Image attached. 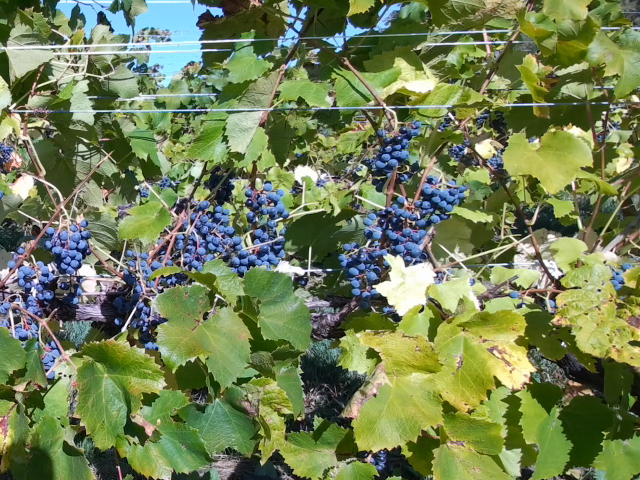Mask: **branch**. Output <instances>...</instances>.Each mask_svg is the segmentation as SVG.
Segmentation results:
<instances>
[{
    "label": "branch",
    "instance_id": "obj_2",
    "mask_svg": "<svg viewBox=\"0 0 640 480\" xmlns=\"http://www.w3.org/2000/svg\"><path fill=\"white\" fill-rule=\"evenodd\" d=\"M462 146L468 152H470V154L475 158V160L486 171H488L492 176H494V178L498 182V184L501 187V189L506 193V196L511 201V203L514 206L516 212L522 218L524 224L527 227V230H528V233H529V236H530V243L534 244V246H535V255L537 257V261L540 262V266L543 267V270L546 272L549 280L551 281V283L555 287V288H528V289L520 290L519 294L520 295H525V294H530V293H556V294H562L563 293L562 286L554 278L551 270L548 268V265L542 259V255L540 253V244L538 242L537 237L535 236V233L533 231V227L531 225V222L528 220L526 214L521 210L519 204L517 203L516 199L513 197V195L510 192V190L506 187V185H505L504 181L502 180V178L499 176V174L495 170H493L489 165H487V163L485 161H483V159L477 154V152L472 147L469 146L468 143L463 142Z\"/></svg>",
    "mask_w": 640,
    "mask_h": 480
},
{
    "label": "branch",
    "instance_id": "obj_13",
    "mask_svg": "<svg viewBox=\"0 0 640 480\" xmlns=\"http://www.w3.org/2000/svg\"><path fill=\"white\" fill-rule=\"evenodd\" d=\"M233 172L232 168H229L222 176L221 178L212 186V188L210 189V191L204 196V200L208 201L211 196L215 193V191L217 190V188L226 180L227 177H229L231 175V173Z\"/></svg>",
    "mask_w": 640,
    "mask_h": 480
},
{
    "label": "branch",
    "instance_id": "obj_16",
    "mask_svg": "<svg viewBox=\"0 0 640 480\" xmlns=\"http://www.w3.org/2000/svg\"><path fill=\"white\" fill-rule=\"evenodd\" d=\"M383 115L385 117V119L390 123L391 127L395 126V121L394 119L390 116L388 110L386 109L385 111H383Z\"/></svg>",
    "mask_w": 640,
    "mask_h": 480
},
{
    "label": "branch",
    "instance_id": "obj_3",
    "mask_svg": "<svg viewBox=\"0 0 640 480\" xmlns=\"http://www.w3.org/2000/svg\"><path fill=\"white\" fill-rule=\"evenodd\" d=\"M185 206H186V201L182 200L180 205H179V208H178V217L176 219L175 226L172 227L169 230V232L159 242V245L148 255V257H147V261L148 262L152 261V259L155 257V255L157 253H159L163 249L164 245L169 240L166 253H165V255L163 257V260H162L163 264H166L168 262V259H169L170 255H171V252H172V249H173L174 241H175V239H176V237H177V235L179 233V230L181 229L180 225H181V221L183 219V210H184Z\"/></svg>",
    "mask_w": 640,
    "mask_h": 480
},
{
    "label": "branch",
    "instance_id": "obj_8",
    "mask_svg": "<svg viewBox=\"0 0 640 480\" xmlns=\"http://www.w3.org/2000/svg\"><path fill=\"white\" fill-rule=\"evenodd\" d=\"M447 145H448V141L444 140L443 143L433 153L429 164L426 166V168H425L424 172L422 173L421 178H420V180H419V182H418V184L416 186V193L414 195V199L415 200H418L419 197L421 196V189H422V186H423V184H424V182L426 180V177L428 176V174L430 173L432 167L434 166L438 155L440 154L441 151H443L447 147Z\"/></svg>",
    "mask_w": 640,
    "mask_h": 480
},
{
    "label": "branch",
    "instance_id": "obj_1",
    "mask_svg": "<svg viewBox=\"0 0 640 480\" xmlns=\"http://www.w3.org/2000/svg\"><path fill=\"white\" fill-rule=\"evenodd\" d=\"M22 147L25 151V154L27 156V158L29 159V162L32 166V168L35 170L38 179L40 181V184L42 186V189L44 190V193L46 194L47 199L49 200V202L51 203V206L53 207V210L55 211L54 214L49 218V220L46 222V224L44 225V227L41 229L40 233L38 234V236L34 239V241L32 242V244L29 246V248L27 250L24 251L22 257L17 261V263H15L12 267V269L0 280V287H3L4 284L11 278V276L17 271V269L26 261V259L28 258L29 255L32 254L34 248L38 245V243L41 241V239L43 238V236L45 235V230L47 228H49L53 222L56 220V218L58 216L61 215V211L63 210L64 206L66 204H68L71 200H73L75 198V196L77 195V193L83 188V186L86 184V182L89 180V178L93 175V173L105 162V160L107 158H109L110 156H112L113 154H115L117 152L116 148H112L109 151H107L100 159L99 161L89 169V171L87 172V174L82 178V180L78 183V185L76 186V188L72 191V193L64 200H62L59 204V206L57 205L55 199L53 198V196L51 195V192L49 191V188L47 187V184L45 182V179L43 177L42 171L40 170V168L38 167V165L36 164L34 157L32 156V153L29 149V146L27 145V141L23 140L22 141ZM60 222L63 225L67 224L66 219L63 216L59 217Z\"/></svg>",
    "mask_w": 640,
    "mask_h": 480
},
{
    "label": "branch",
    "instance_id": "obj_7",
    "mask_svg": "<svg viewBox=\"0 0 640 480\" xmlns=\"http://www.w3.org/2000/svg\"><path fill=\"white\" fill-rule=\"evenodd\" d=\"M610 118V110L606 109L605 110V116L603 118V122H602V132H601V136H600V180L604 181L605 180V138H606V134H607V124Z\"/></svg>",
    "mask_w": 640,
    "mask_h": 480
},
{
    "label": "branch",
    "instance_id": "obj_12",
    "mask_svg": "<svg viewBox=\"0 0 640 480\" xmlns=\"http://www.w3.org/2000/svg\"><path fill=\"white\" fill-rule=\"evenodd\" d=\"M89 252L99 260V262L103 265L104 268H106L107 271H109L110 274H113L118 279L123 278V275L114 270L94 248H90Z\"/></svg>",
    "mask_w": 640,
    "mask_h": 480
},
{
    "label": "branch",
    "instance_id": "obj_9",
    "mask_svg": "<svg viewBox=\"0 0 640 480\" xmlns=\"http://www.w3.org/2000/svg\"><path fill=\"white\" fill-rule=\"evenodd\" d=\"M324 11L323 7H319L317 11L310 17L302 30L294 28L289 23L285 24V28L297 35H305L308 29L311 27L312 23L320 16V14Z\"/></svg>",
    "mask_w": 640,
    "mask_h": 480
},
{
    "label": "branch",
    "instance_id": "obj_4",
    "mask_svg": "<svg viewBox=\"0 0 640 480\" xmlns=\"http://www.w3.org/2000/svg\"><path fill=\"white\" fill-rule=\"evenodd\" d=\"M307 43L313 44L314 46L320 48L321 50L328 52L333 57L338 58L345 65V67L356 77V79L359 80V82L362 83L367 90H369V92L374 97V100L377 102V104L379 106H382V105L386 106V103L382 101L381 98H379V95L376 93L374 88L364 79L363 76L359 74V72L356 69L352 67V65L347 61V59L344 56H342L338 52H335L334 50H329L327 46L323 45L317 40H307Z\"/></svg>",
    "mask_w": 640,
    "mask_h": 480
},
{
    "label": "branch",
    "instance_id": "obj_14",
    "mask_svg": "<svg viewBox=\"0 0 640 480\" xmlns=\"http://www.w3.org/2000/svg\"><path fill=\"white\" fill-rule=\"evenodd\" d=\"M397 181V170L393 169L390 173V181H389V187H388V192H387V196H386V205L390 206L391 205V198L393 195V189H394V183Z\"/></svg>",
    "mask_w": 640,
    "mask_h": 480
},
{
    "label": "branch",
    "instance_id": "obj_10",
    "mask_svg": "<svg viewBox=\"0 0 640 480\" xmlns=\"http://www.w3.org/2000/svg\"><path fill=\"white\" fill-rule=\"evenodd\" d=\"M601 199H602V195L598 194L597 197H596L595 204H594L593 209H592L591 216H590L589 221H588V223H587V225H586V227L584 229V232H583V240L584 241L588 240V234H589V231H590V229H591V227H592V225L594 223V220L596 218V215H597V212H598V208L600 207Z\"/></svg>",
    "mask_w": 640,
    "mask_h": 480
},
{
    "label": "branch",
    "instance_id": "obj_15",
    "mask_svg": "<svg viewBox=\"0 0 640 480\" xmlns=\"http://www.w3.org/2000/svg\"><path fill=\"white\" fill-rule=\"evenodd\" d=\"M46 68H47V65H46V64H42V65L38 68V70H37V74L35 75V77H34V79H33V81H32V84H31V88H30V96H31V97H34V96H35V90H36L37 83H38V81H39L40 77L42 76L43 71H44Z\"/></svg>",
    "mask_w": 640,
    "mask_h": 480
},
{
    "label": "branch",
    "instance_id": "obj_5",
    "mask_svg": "<svg viewBox=\"0 0 640 480\" xmlns=\"http://www.w3.org/2000/svg\"><path fill=\"white\" fill-rule=\"evenodd\" d=\"M301 43H302V40H296V41H295V43H294V45H293V46H292V48L290 49V52L288 53L287 57L284 59V61H283V63H282V66H281V68H280V70H279L278 74H277V75H276V77H275V80H274L273 86H272V88H271V90H270V94H269V96H268V98H267V102H266V106H267V107H270V106H271V104H272V100H273V98H274V96H275V92H276V90H277V88H278V85H279L280 79H281V77L283 76V74H284V72H285V70H286V68H287L288 63L290 62V60L292 59V57L295 55V51L299 48V46H300V44H301Z\"/></svg>",
    "mask_w": 640,
    "mask_h": 480
},
{
    "label": "branch",
    "instance_id": "obj_6",
    "mask_svg": "<svg viewBox=\"0 0 640 480\" xmlns=\"http://www.w3.org/2000/svg\"><path fill=\"white\" fill-rule=\"evenodd\" d=\"M521 34L520 30H517L516 34H512L509 39L507 40V44L501 49V51L498 53L495 62L492 64L491 68L489 69V71L487 72V76L484 79V82L481 84L480 86V92L484 93L485 92V88L486 86L489 84V81L492 78V74L494 73V71L496 70L497 66L500 64L501 59L503 58V55L506 53V51L511 47L513 41Z\"/></svg>",
    "mask_w": 640,
    "mask_h": 480
},
{
    "label": "branch",
    "instance_id": "obj_17",
    "mask_svg": "<svg viewBox=\"0 0 640 480\" xmlns=\"http://www.w3.org/2000/svg\"><path fill=\"white\" fill-rule=\"evenodd\" d=\"M397 185H398V187H399V188H400V190H401L402 197H403V198H406V197H407V191H406V188H405V186L403 185V183H402L401 181H398V182H397Z\"/></svg>",
    "mask_w": 640,
    "mask_h": 480
},
{
    "label": "branch",
    "instance_id": "obj_11",
    "mask_svg": "<svg viewBox=\"0 0 640 480\" xmlns=\"http://www.w3.org/2000/svg\"><path fill=\"white\" fill-rule=\"evenodd\" d=\"M208 165H209L208 161H204L203 162V167L201 169V172H200V175H199V177L197 179V182H196L194 188L192 189V191L190 192V194L187 196V201L188 202L192 201V198L195 196V194L199 190V188H200V186L202 184V181H203V179L205 177L206 171L208 169Z\"/></svg>",
    "mask_w": 640,
    "mask_h": 480
}]
</instances>
